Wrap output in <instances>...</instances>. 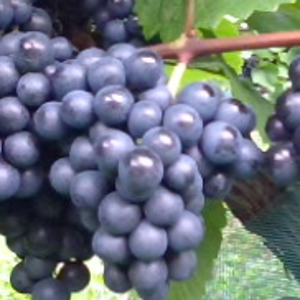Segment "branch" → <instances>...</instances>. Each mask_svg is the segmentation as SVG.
<instances>
[{"instance_id":"30e6481e","label":"branch","mask_w":300,"mask_h":300,"mask_svg":"<svg viewBox=\"0 0 300 300\" xmlns=\"http://www.w3.org/2000/svg\"><path fill=\"white\" fill-rule=\"evenodd\" d=\"M298 45H300V30L295 29L240 37L200 39L196 30V0H186L183 33L170 44H157L154 47L163 59H176L190 65L198 56H209L211 53Z\"/></svg>"}]
</instances>
